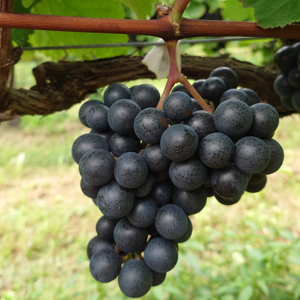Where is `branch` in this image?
<instances>
[{
    "instance_id": "obj_1",
    "label": "branch",
    "mask_w": 300,
    "mask_h": 300,
    "mask_svg": "<svg viewBox=\"0 0 300 300\" xmlns=\"http://www.w3.org/2000/svg\"><path fill=\"white\" fill-rule=\"evenodd\" d=\"M191 0L158 5L160 20L114 19L71 15H40L0 12V27L62 32L147 35L153 37H269L300 41V24L264 29L253 21L181 19Z\"/></svg>"
}]
</instances>
